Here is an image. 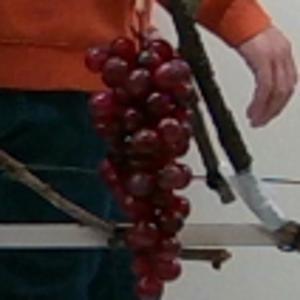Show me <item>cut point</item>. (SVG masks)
Returning a JSON list of instances; mask_svg holds the SVG:
<instances>
[{
    "instance_id": "obj_1",
    "label": "cut point",
    "mask_w": 300,
    "mask_h": 300,
    "mask_svg": "<svg viewBox=\"0 0 300 300\" xmlns=\"http://www.w3.org/2000/svg\"><path fill=\"white\" fill-rule=\"evenodd\" d=\"M145 7H146L145 0H136L135 17L138 19V33H139L137 51H140V49H145L148 45V38L146 36V31H145V14H144Z\"/></svg>"
}]
</instances>
